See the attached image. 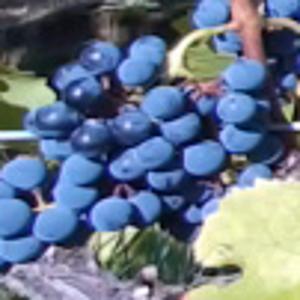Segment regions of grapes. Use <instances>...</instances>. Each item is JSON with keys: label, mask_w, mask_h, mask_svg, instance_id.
Instances as JSON below:
<instances>
[{"label": "grapes", "mask_w": 300, "mask_h": 300, "mask_svg": "<svg viewBox=\"0 0 300 300\" xmlns=\"http://www.w3.org/2000/svg\"><path fill=\"white\" fill-rule=\"evenodd\" d=\"M217 53L236 57L212 81L167 77L165 37L140 34L127 46L103 38L78 44L53 75L55 103L23 114V127L52 163L18 155L0 169V274L42 258L50 245L89 233L160 220L182 244L196 241L203 222L227 193L212 177L246 153L234 184L268 182L286 154L269 130L270 103L257 93L268 67L245 56L237 30L211 37Z\"/></svg>", "instance_id": "01657485"}, {"label": "grapes", "mask_w": 300, "mask_h": 300, "mask_svg": "<svg viewBox=\"0 0 300 300\" xmlns=\"http://www.w3.org/2000/svg\"><path fill=\"white\" fill-rule=\"evenodd\" d=\"M191 26L193 29H206L214 24L229 21L230 0H200L193 6Z\"/></svg>", "instance_id": "0513c4c2"}, {"label": "grapes", "mask_w": 300, "mask_h": 300, "mask_svg": "<svg viewBox=\"0 0 300 300\" xmlns=\"http://www.w3.org/2000/svg\"><path fill=\"white\" fill-rule=\"evenodd\" d=\"M263 12L272 20L295 22L300 18V0H264Z\"/></svg>", "instance_id": "84f90ec7"}, {"label": "grapes", "mask_w": 300, "mask_h": 300, "mask_svg": "<svg viewBox=\"0 0 300 300\" xmlns=\"http://www.w3.org/2000/svg\"><path fill=\"white\" fill-rule=\"evenodd\" d=\"M265 56L276 62L275 86L280 92L293 90L300 77V33L287 28L265 31Z\"/></svg>", "instance_id": "b958b902"}]
</instances>
